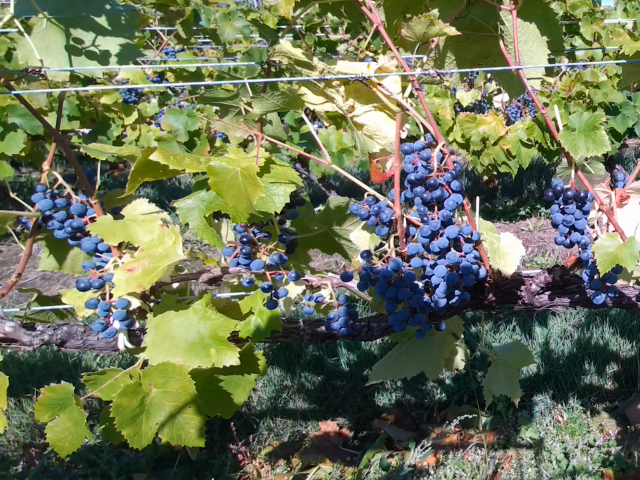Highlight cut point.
<instances>
[{
    "label": "cut point",
    "mask_w": 640,
    "mask_h": 480,
    "mask_svg": "<svg viewBox=\"0 0 640 480\" xmlns=\"http://www.w3.org/2000/svg\"><path fill=\"white\" fill-rule=\"evenodd\" d=\"M49 173H51L54 177H56L67 191H71V188L68 185H66L65 181L62 179V177L59 174L55 173L51 168L49 170Z\"/></svg>",
    "instance_id": "cut-point-1"
}]
</instances>
